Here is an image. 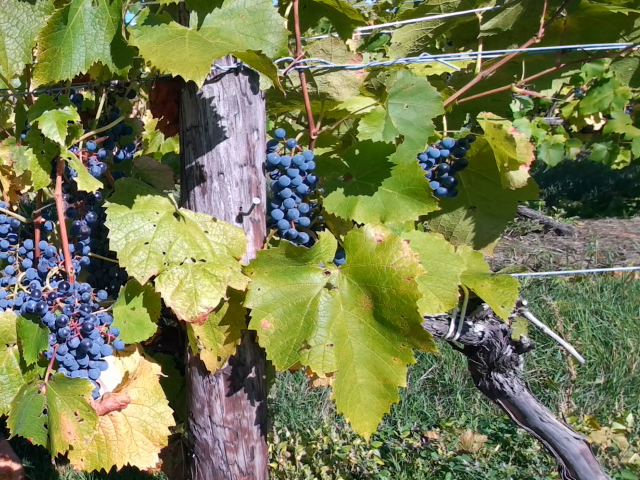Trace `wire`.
Instances as JSON below:
<instances>
[{
	"instance_id": "d2f4af69",
	"label": "wire",
	"mask_w": 640,
	"mask_h": 480,
	"mask_svg": "<svg viewBox=\"0 0 640 480\" xmlns=\"http://www.w3.org/2000/svg\"><path fill=\"white\" fill-rule=\"evenodd\" d=\"M633 42L628 40L627 42H610V43H586L582 45H550L540 47H523L517 48L508 46L502 50H479L474 52L465 53H451L448 55H433L424 54L419 55H403L395 59H375L370 62L355 63V64H336L333 61L318 57H305L297 59L295 56H282L273 60L274 64H278L284 61H292L294 66L286 69L287 73H292L299 68L327 70L334 69L335 71H357L372 69L377 66H397L401 63H414L418 62H451L459 59H495L503 57L507 52L523 53V54H542L552 52H584L589 50H615V49H627L632 46Z\"/></svg>"
},
{
	"instance_id": "a73af890",
	"label": "wire",
	"mask_w": 640,
	"mask_h": 480,
	"mask_svg": "<svg viewBox=\"0 0 640 480\" xmlns=\"http://www.w3.org/2000/svg\"><path fill=\"white\" fill-rule=\"evenodd\" d=\"M636 266L630 267H618V266H598L596 268H567L563 270H539V271H527V272H512V277H529V276H541L552 275L560 276L569 273H598L600 271H616V272H632L636 271Z\"/></svg>"
},
{
	"instance_id": "4f2155b8",
	"label": "wire",
	"mask_w": 640,
	"mask_h": 480,
	"mask_svg": "<svg viewBox=\"0 0 640 480\" xmlns=\"http://www.w3.org/2000/svg\"><path fill=\"white\" fill-rule=\"evenodd\" d=\"M494 9V6H483V7H475L472 9H465V10H461V11H450V12H445L442 15H437V16H423L420 18H416V19H406V20H397V21H392L389 23H382V24H376V25H372V26H362L360 28H352V31H362L364 29H374V28H378V27H384V26H392L394 24H399V23H408V22H424V21H431V20H440V19H445V18H449L452 16H457L460 14H471V13H475L481 10H491Z\"/></svg>"
}]
</instances>
